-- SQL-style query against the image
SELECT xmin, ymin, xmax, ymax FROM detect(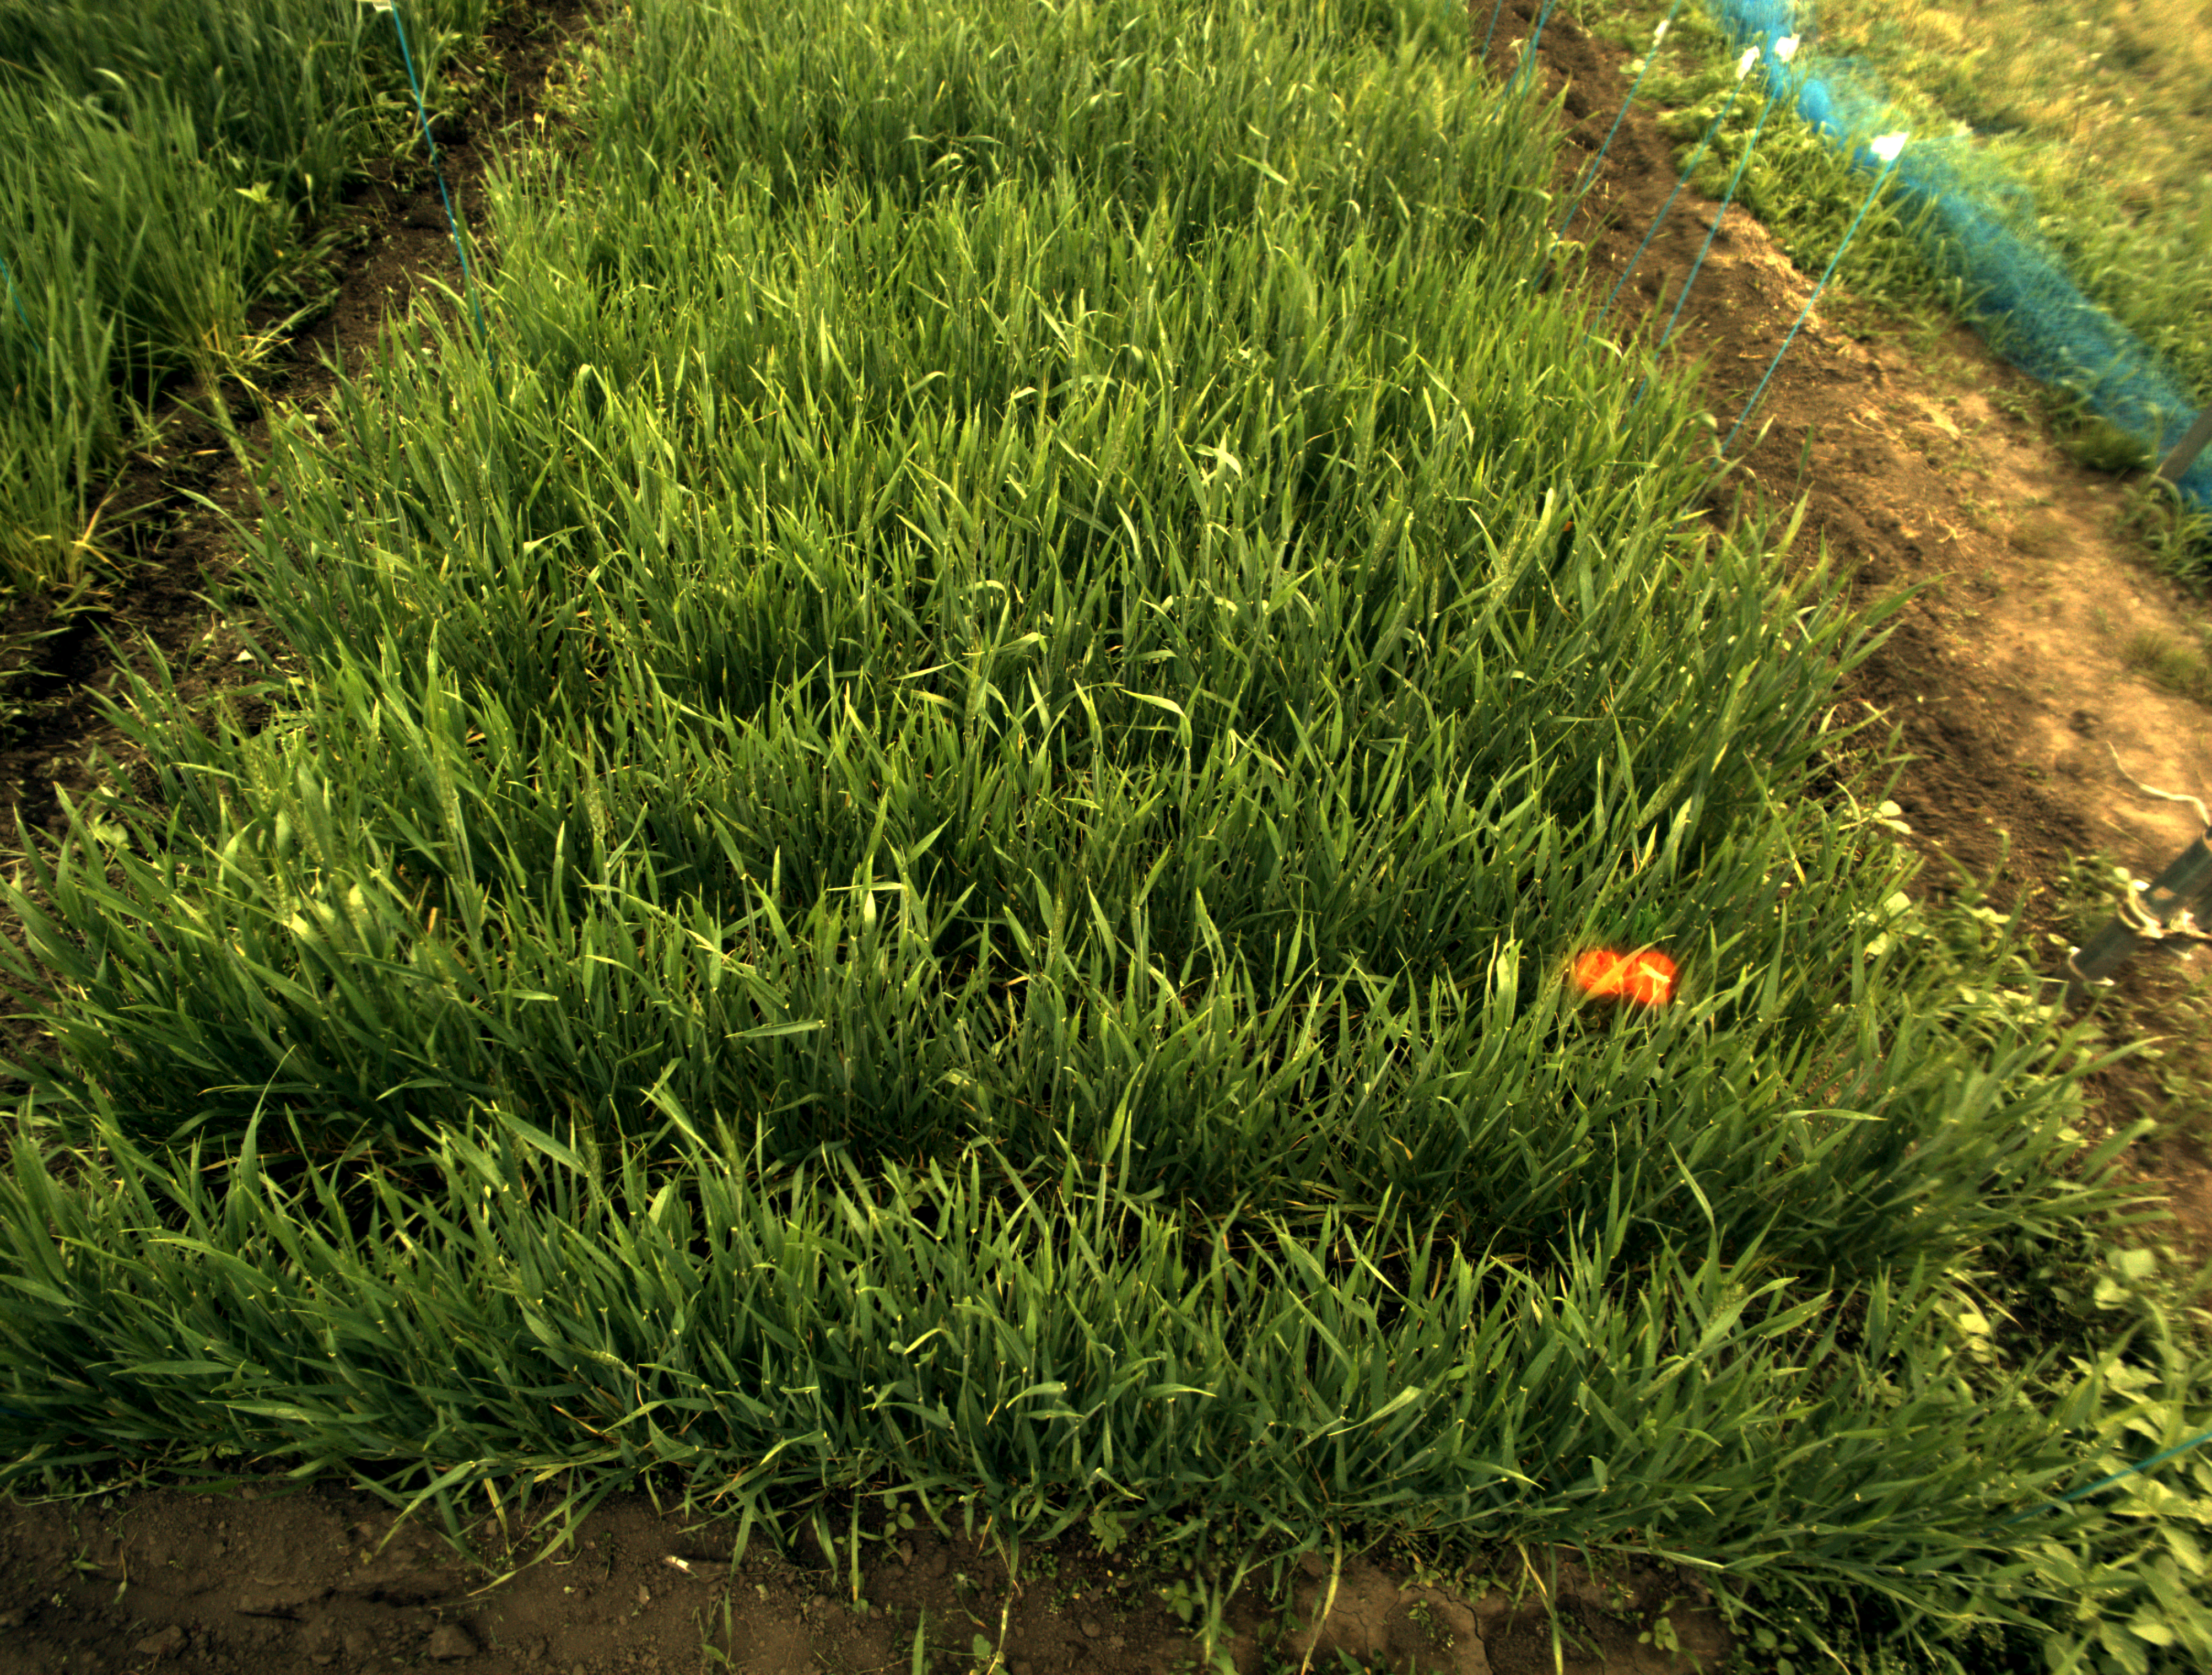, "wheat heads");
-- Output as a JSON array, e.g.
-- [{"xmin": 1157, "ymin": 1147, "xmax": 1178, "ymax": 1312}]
[
  {"xmin": 1562, "ymin": 969, "xmax": 1586, "ymax": 1024},
  {"xmin": 1636, "ymin": 776, "xmax": 1680, "ymax": 829},
  {"xmin": 1579, "ymin": 514, "xmax": 1594, "ymax": 545},
  {"xmin": 1221, "ymin": 285, "xmax": 1240, "ymax": 327},
  {"xmin": 1169, "ymin": 429, "xmax": 1185, "ymax": 480},
  {"xmin": 1171, "ymin": 335, "xmax": 1180, "ymax": 377},
  {"xmin": 1219, "ymin": 339, "xmax": 1227, "ymax": 361},
  {"xmin": 1359, "ymin": 417, "xmax": 1375, "ymax": 474},
  {"xmin": 945, "ymin": 508, "xmax": 959, "ymax": 548},
  {"xmin": 1263, "ymin": 1057, "xmax": 1299, "ymax": 1094},
  {"xmin": 1431, "ymin": 476, "xmax": 1447, "ymax": 510},
  {"xmin": 240, "ymin": 735, "xmax": 272, "ymax": 814},
  {"xmin": 1035, "ymin": 421, "xmax": 1043, "ymax": 458},
  {"xmin": 1013, "ymin": 234, "xmax": 1020, "ymax": 296},
  {"xmin": 1837, "ymin": 986, "xmax": 1873, "ymax": 1046},
  {"xmin": 592, "ymin": 1347, "xmax": 627, "ymax": 1371},
  {"xmin": 210, "ymin": 398, "xmax": 251, "ymax": 475},
  {"xmin": 1049, "ymin": 641, "xmax": 1058, "ymax": 676},
  {"xmin": 1427, "ymin": 574, "xmax": 1440, "ymax": 621},
  {"xmin": 1154, "ymin": 204, "xmax": 1166, "ymax": 258},
  {"xmin": 1783, "ymin": 576, "xmax": 1816, "ymax": 619},
  {"xmin": 267, "ymin": 417, "xmax": 294, "ymax": 482},
  {"xmin": 1743, "ymin": 992, "xmax": 1787, "ymax": 1053},
  {"xmin": 1593, "ymin": 590, "xmax": 1615, "ymax": 631},
  {"xmin": 1757, "ymin": 595, "xmax": 1786, "ymax": 656},
  {"xmin": 575, "ymin": 502, "xmax": 601, "ymax": 541},
  {"xmin": 1889, "ymin": 1055, "xmax": 1956, "ymax": 1099},
  {"xmin": 481, "ymin": 1249, "xmax": 517, "ymax": 1292},
  {"xmin": 1536, "ymin": 958, "xmax": 1567, "ymax": 1010},
  {"xmin": 807, "ymin": 229, "xmax": 819, "ymax": 280},
  {"xmin": 1136, "ymin": 285, "xmax": 1146, "ymax": 326},
  {"xmin": 1703, "ymin": 1282, "xmax": 1746, "ymax": 1337},
  {"xmin": 504, "ymin": 1126, "xmax": 524, "ymax": 1172},
  {"xmin": 274, "ymin": 876, "xmax": 293, "ymax": 924},
  {"xmin": 464, "ymin": 440, "xmax": 484, "ymax": 498},
  {"xmin": 463, "ymin": 474, "xmax": 480, "ymax": 532},
  {"xmin": 1605, "ymin": 612, "xmax": 1626, "ymax": 647},
  {"xmin": 986, "ymin": 462, "xmax": 994, "ymax": 497},
  {"xmin": 1076, "ymin": 329, "xmax": 1085, "ymax": 368},
  {"xmin": 1457, "ymin": 362, "xmax": 1476, "ymax": 415},
  {"xmin": 330, "ymin": 876, "xmax": 358, "ymax": 927},
  {"xmin": 964, "ymin": 677, "xmax": 979, "ymax": 739},
  {"xmin": 585, "ymin": 767, "xmax": 605, "ymax": 837},
  {"xmin": 903, "ymin": 883, "xmax": 911, "ymax": 907},
  {"xmin": 793, "ymin": 269, "xmax": 808, "ymax": 330},
  {"xmin": 1432, "ymin": 80, "xmax": 1445, "ymax": 126},
  {"xmin": 1653, "ymin": 1358, "xmax": 1692, "ymax": 1388},
  {"xmin": 1371, "ymin": 519, "xmax": 1390, "ymax": 566},
  {"xmin": 1685, "ymin": 1564, "xmax": 1724, "ymax": 1574},
  {"xmin": 663, "ymin": 516, "xmax": 682, "ymax": 555},
  {"xmin": 1101, "ymin": 421, "xmax": 1127, "ymax": 486},
  {"xmin": 583, "ymin": 1133, "xmax": 603, "ymax": 1201},
  {"xmin": 1748, "ymin": 536, "xmax": 1793, "ymax": 600},
  {"xmin": 724, "ymin": 1149, "xmax": 743, "ymax": 1197},
  {"xmin": 1509, "ymin": 527, "xmax": 1544, "ymax": 589},
  {"xmin": 1146, "ymin": 437, "xmax": 1161, "ymax": 481},
  {"xmin": 1490, "ymin": 535, "xmax": 1521, "ymax": 599},
  {"xmin": 1608, "ymin": 763, "xmax": 1622, "ymax": 800},
  {"xmin": 278, "ymin": 788, "xmax": 327, "ymax": 865},
  {"xmin": 1007, "ymin": 313, "xmax": 1015, "ymax": 365},
  {"xmin": 424, "ymin": 944, "xmax": 455, "ymax": 993},
  {"xmin": 1616, "ymin": 503, "xmax": 1647, "ymax": 577},
  {"xmin": 366, "ymin": 423, "xmax": 384, "ymax": 491},
  {"xmin": 999, "ymin": 228, "xmax": 1008, "ymax": 282},
  {"xmin": 1621, "ymin": 599, "xmax": 1651, "ymax": 652},
  {"xmin": 1357, "ymin": 142, "xmax": 1374, "ymax": 189},
  {"xmin": 527, "ymin": 1298, "xmax": 558, "ymax": 1334},
  {"xmin": 1200, "ymin": 522, "xmax": 1207, "ymax": 558},
  {"xmin": 435, "ymin": 755, "xmax": 456, "ymax": 827},
  {"xmin": 927, "ymin": 463, "xmax": 938, "ymax": 509},
  {"xmin": 1283, "ymin": 176, "xmax": 1298, "ymax": 205},
  {"xmin": 969, "ymin": 523, "xmax": 981, "ymax": 576},
  {"xmin": 239, "ymin": 841, "xmax": 278, "ymax": 905},
  {"xmin": 1459, "ymin": 699, "xmax": 1483, "ymax": 736},
  {"xmin": 1183, "ymin": 578, "xmax": 1195, "ymax": 623},
  {"xmin": 1560, "ymin": 446, "xmax": 1576, "ymax": 487},
  {"xmin": 1050, "ymin": 897, "xmax": 1066, "ymax": 956},
  {"xmin": 950, "ymin": 484, "xmax": 958, "ymax": 508},
  {"xmin": 1130, "ymin": 895, "xmax": 1137, "ymax": 933},
  {"xmin": 1395, "ymin": 586, "xmax": 1416, "ymax": 629},
  {"xmin": 862, "ymin": 498, "xmax": 871, "ymax": 548},
  {"xmin": 420, "ymin": 467, "xmax": 445, "ymax": 531},
  {"xmin": 1282, "ymin": 11, "xmax": 1296, "ymax": 54}
]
